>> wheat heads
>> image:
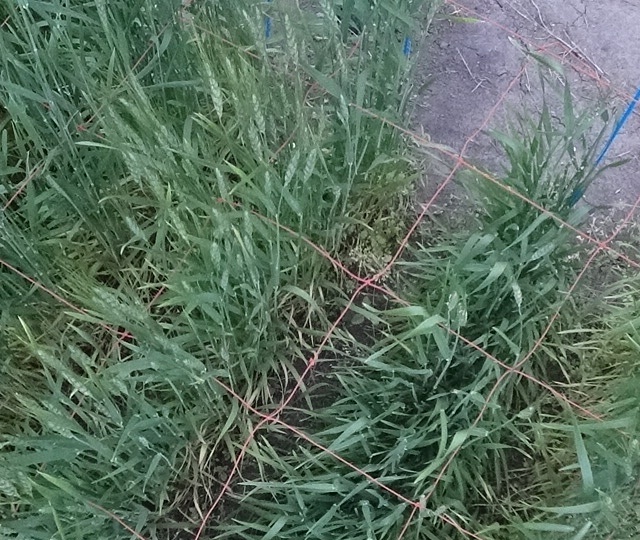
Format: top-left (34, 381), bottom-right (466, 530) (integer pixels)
top-left (316, 1), bottom-right (338, 24)
top-left (261, 170), bottom-right (271, 195)
top-left (625, 439), bottom-right (637, 456)
top-left (241, 235), bottom-right (255, 258)
top-left (245, 123), bottom-right (261, 153)
top-left (251, 93), bottom-right (264, 125)
top-left (212, 209), bottom-right (229, 234)
top-left (131, 296), bottom-right (150, 317)
top-left (108, 107), bottom-right (127, 139)
top-left (123, 218), bottom-right (153, 244)
top-left (182, 357), bottom-right (209, 376)
top-left (530, 244), bottom-right (555, 261)
top-left (507, 279), bottom-right (524, 306)
top-left (299, 112), bottom-right (310, 151)
top-left (458, 303), bottom-right (468, 327)
top-left (127, 74), bottom-right (152, 106)
top-left (48, 420), bottom-right (72, 440)
top-left (157, 123), bottom-right (182, 146)
top-left (16, 468), bottom-right (33, 497)
top-left (96, 288), bottom-right (126, 313)
top-left (230, 94), bottom-right (245, 134)
top-left (315, 105), bottom-right (331, 131)
top-left (221, 270), bottom-right (230, 288)
top-left (38, 504), bottom-right (57, 516)
top-left (240, 210), bottom-right (255, 236)
top-left (202, 72), bottom-right (225, 118)
top-left (122, 152), bottom-right (143, 184)
top-left (222, 56), bottom-right (238, 86)
top-left (602, 497), bottom-right (616, 514)
top-left (279, 14), bottom-right (298, 67)
top-left (94, 402), bottom-right (113, 421)
top-left (154, 337), bottom-right (187, 356)
top-left (12, 392), bottom-right (40, 414)
top-left (167, 209), bottom-right (188, 238)
top-left (143, 164), bottom-right (165, 194)
top-left (38, 347), bottom-right (65, 371)
top-left (213, 166), bottom-right (232, 202)
top-left (277, 83), bottom-right (291, 109)
top-left (56, 371), bottom-right (90, 398)
top-left (91, 0), bottom-right (109, 23)
top-left (283, 150), bottom-right (301, 179)
top-left (240, 8), bottom-right (265, 57)
top-left (110, 376), bottom-right (127, 396)
top-left (330, 34), bottom-right (349, 76)
top-left (208, 246), bottom-right (219, 267)
top-left (305, 149), bottom-right (318, 177)
top-left (446, 291), bottom-right (457, 311)
top-left (337, 95), bottom-right (351, 121)
top-left (0, 469), bottom-right (13, 500)
top-left (69, 342), bottom-right (90, 369)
